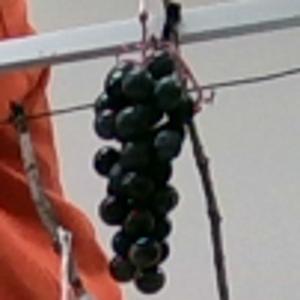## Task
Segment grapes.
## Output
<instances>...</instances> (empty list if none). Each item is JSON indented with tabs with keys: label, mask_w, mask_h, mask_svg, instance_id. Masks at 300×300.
Returning a JSON list of instances; mask_svg holds the SVG:
<instances>
[{
	"label": "grapes",
	"mask_w": 300,
	"mask_h": 300,
	"mask_svg": "<svg viewBox=\"0 0 300 300\" xmlns=\"http://www.w3.org/2000/svg\"><path fill=\"white\" fill-rule=\"evenodd\" d=\"M177 65L166 46L153 49L144 64L120 60L104 79L91 121L96 138L121 144L120 150L102 146L92 158L95 174L108 180L99 217L108 227L120 228L110 239L117 255L107 274L117 284L132 281L145 295L159 293L166 284L159 266L172 254L166 238L173 223L167 215L180 200L170 184L171 160L181 153L183 124L197 111L184 83L171 76Z\"/></svg>",
	"instance_id": "obj_1"
}]
</instances>
